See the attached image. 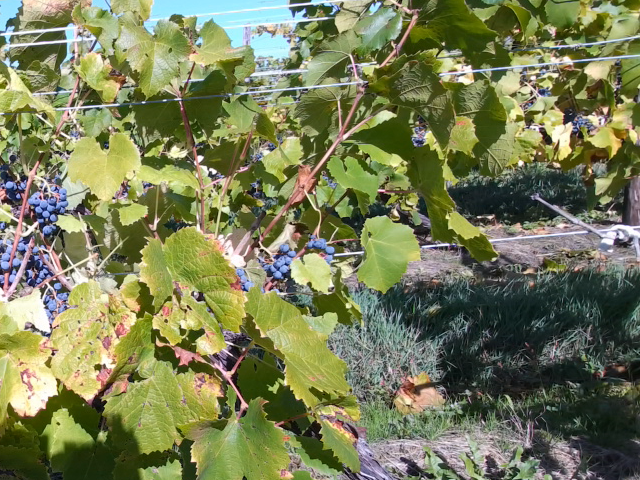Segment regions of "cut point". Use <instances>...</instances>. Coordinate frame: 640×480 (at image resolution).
<instances>
[{
	"label": "cut point",
	"mask_w": 640,
	"mask_h": 480,
	"mask_svg": "<svg viewBox=\"0 0 640 480\" xmlns=\"http://www.w3.org/2000/svg\"><path fill=\"white\" fill-rule=\"evenodd\" d=\"M302 192H304V194L306 195V197L308 198V200L311 203V206L313 207L314 210L317 211L318 213V220H321L322 217V211L320 210L319 207H317L312 199V197L310 196V194L308 193V191L306 189H303Z\"/></svg>",
	"instance_id": "cut-point-1"
},
{
	"label": "cut point",
	"mask_w": 640,
	"mask_h": 480,
	"mask_svg": "<svg viewBox=\"0 0 640 480\" xmlns=\"http://www.w3.org/2000/svg\"><path fill=\"white\" fill-rule=\"evenodd\" d=\"M49 290L51 291L52 296L56 297V293L50 284L46 285L45 290L43 291V295H46V293H48Z\"/></svg>",
	"instance_id": "cut-point-2"
}]
</instances>
